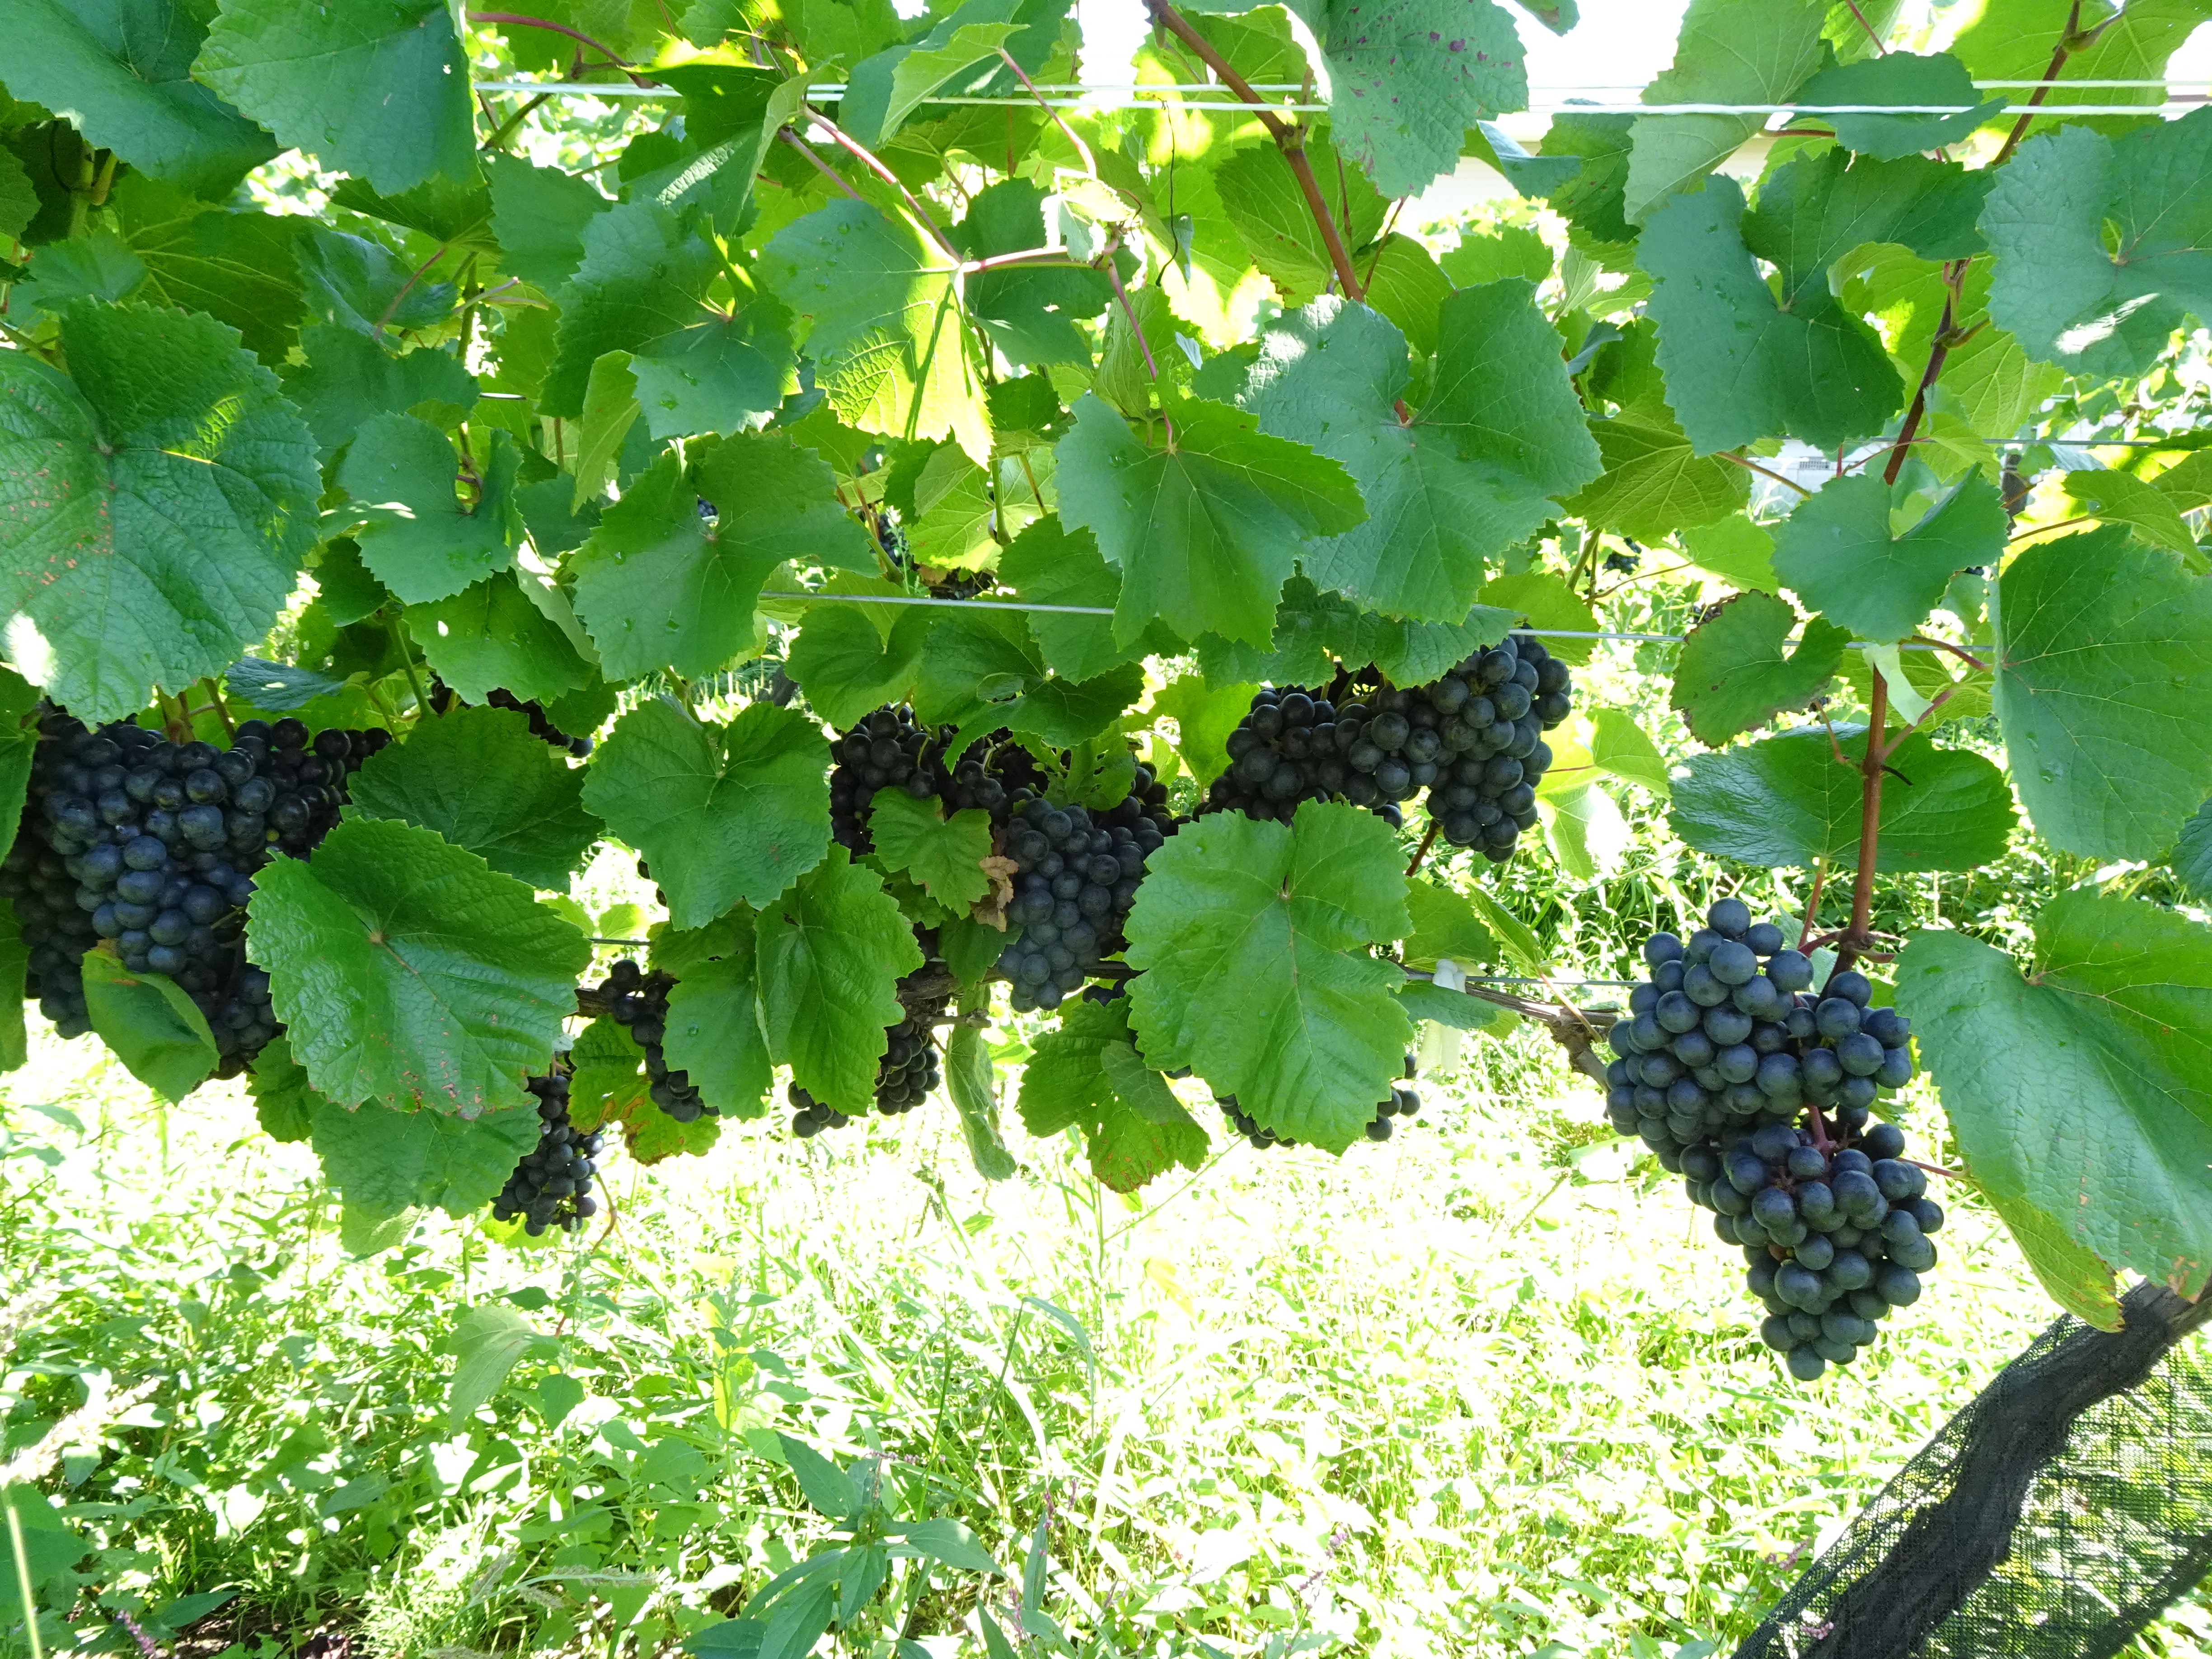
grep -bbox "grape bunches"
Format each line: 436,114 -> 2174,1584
828,701 -> 957,960
1681,1103 -> 1942,1381
788,1080 -> 848,1137
956,690 -> 1048,829
1108,763 -> 1178,836
1799,971 -> 1910,1111
1337,681 -> 1440,800
637,857 -> 667,907
174,719 -> 392,1090
1426,622 -> 1571,863
490,1051 -> 603,1236
1173,763 -> 1252,824
598,959 -> 722,1123
36,714 -> 275,972
1082,978 -> 1194,1078
1212,1093 -> 1296,1150
427,668 -> 593,758
1225,685 -> 1403,831
870,963 -> 951,1115
995,798 -> 1145,1012
1366,1055 -> 1419,1141
0,696 -> 103,1039
1606,898 -> 1816,1173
